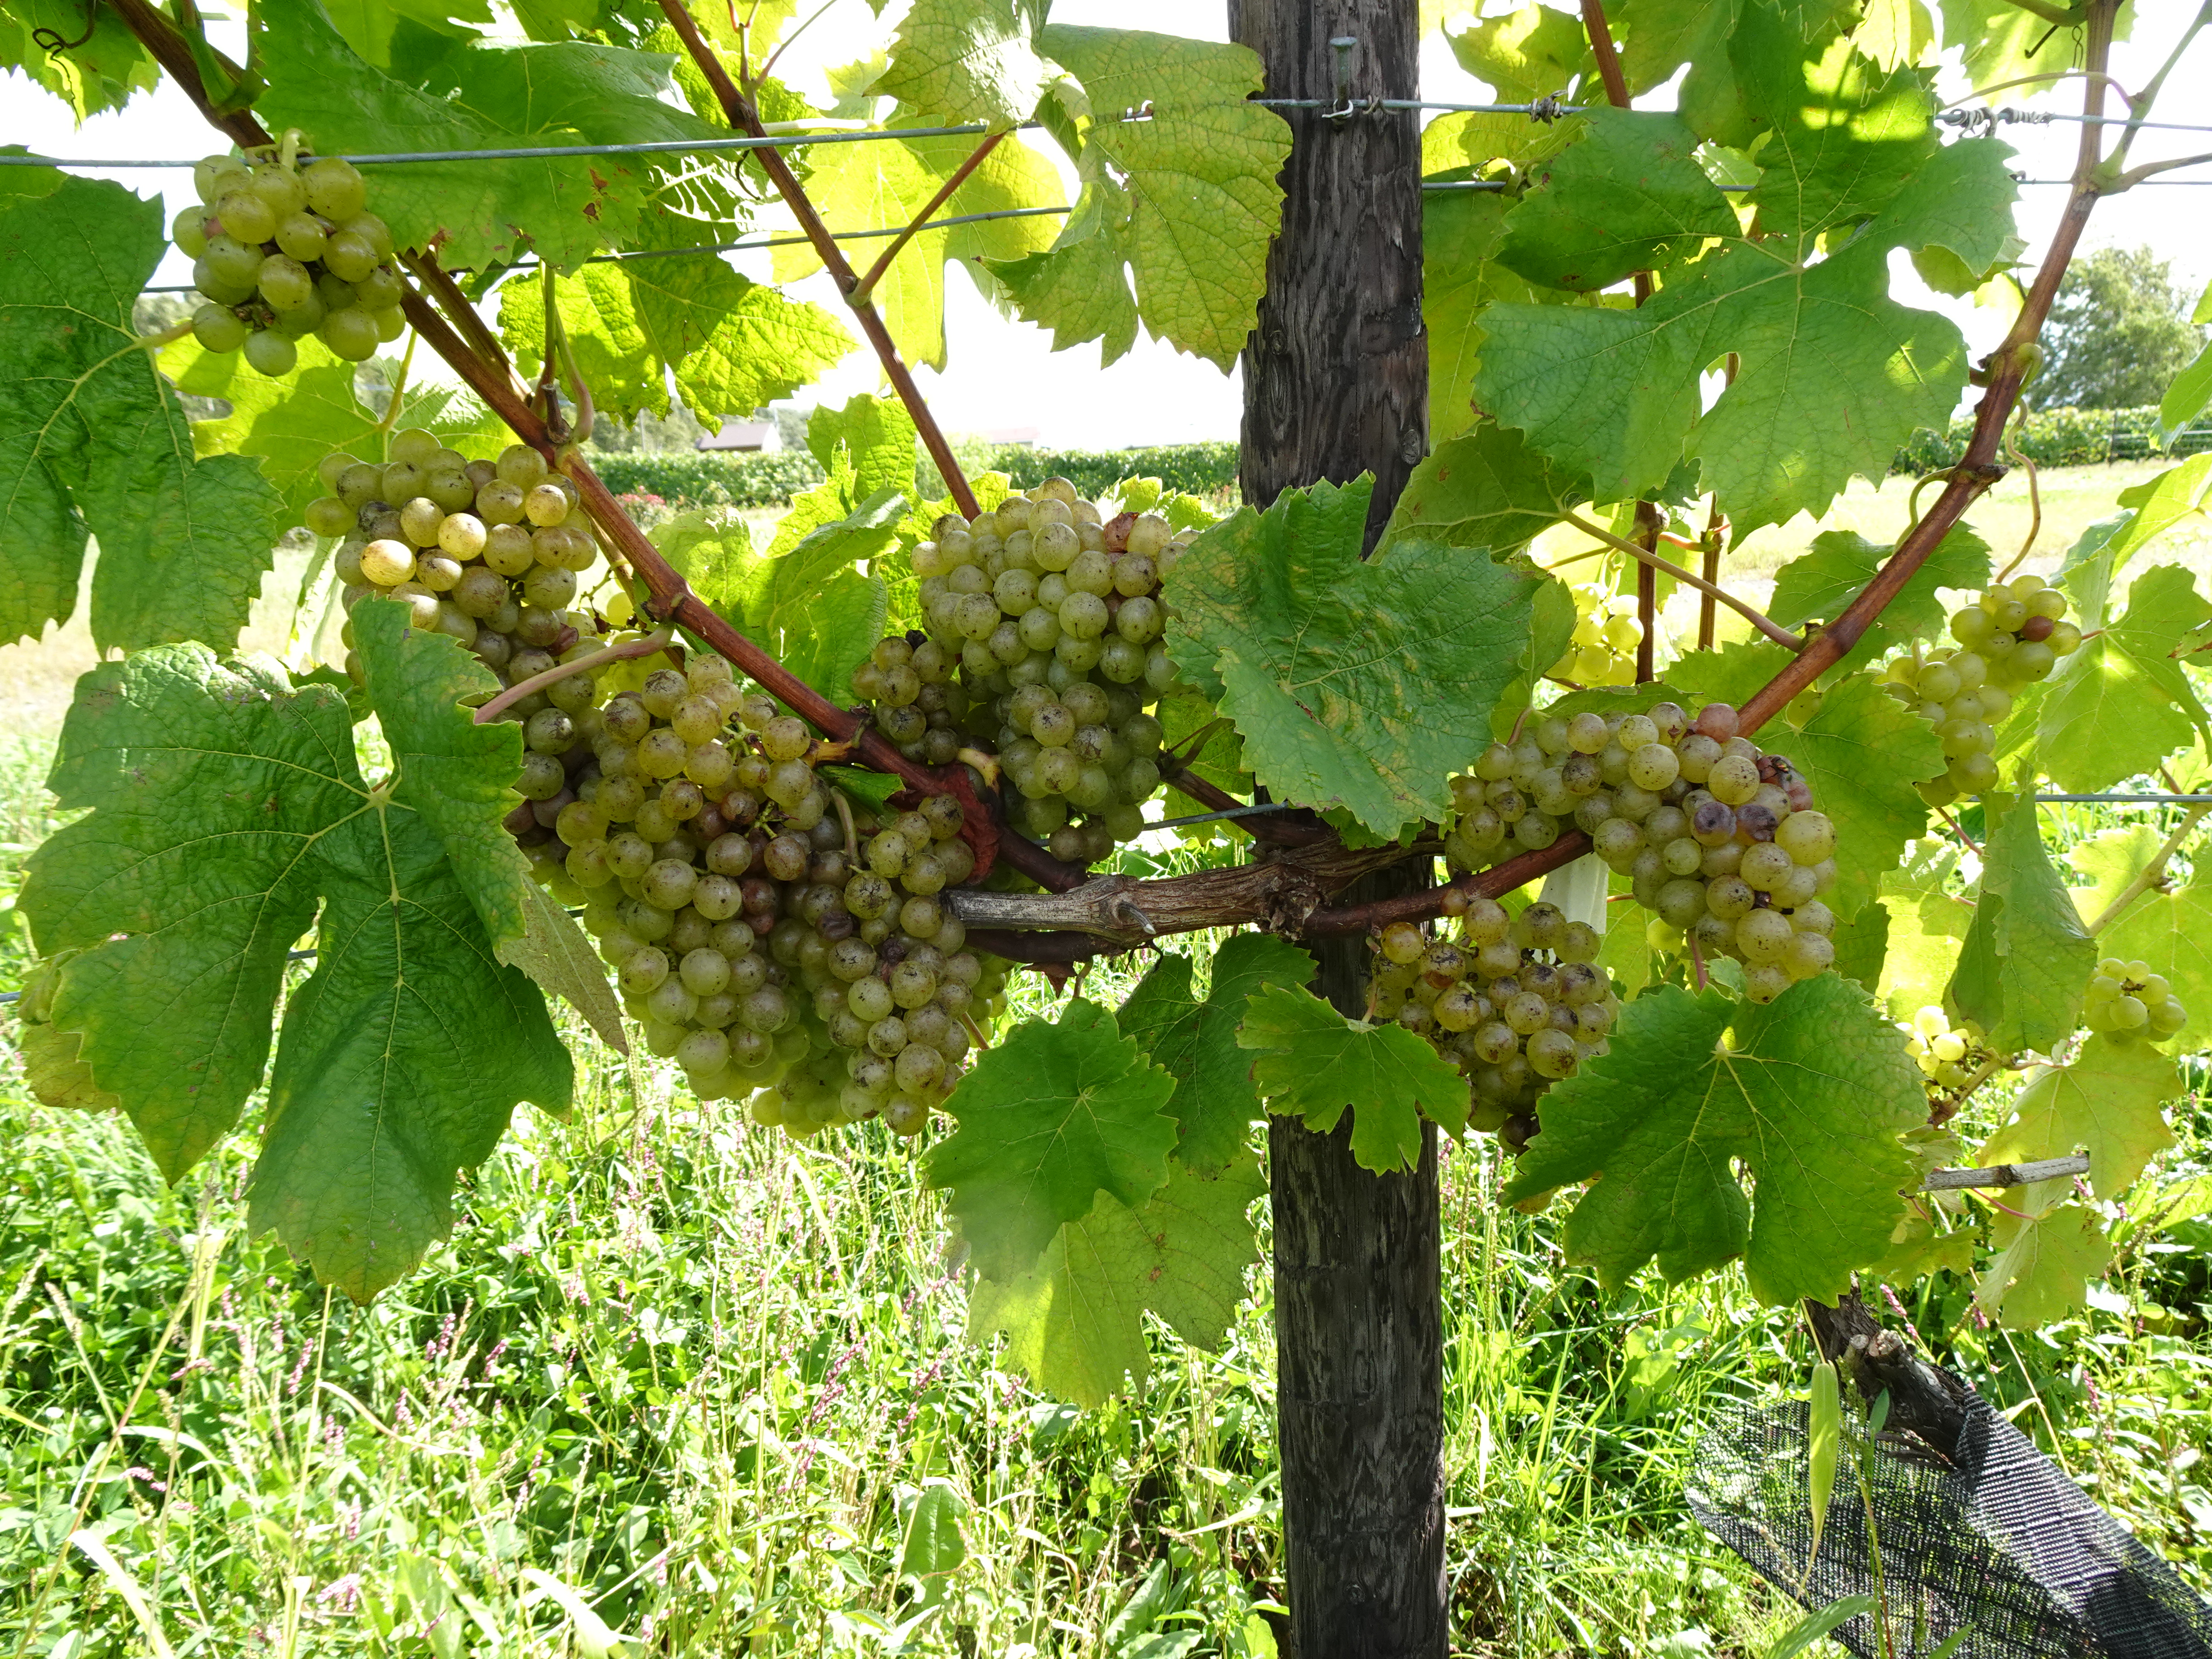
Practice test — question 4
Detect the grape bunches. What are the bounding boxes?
[1542,585,1645,686]
[563,579,689,708]
[2082,958,2187,1047]
[1893,1004,1968,1103]
[741,791,981,1136]
[172,154,407,376]
[303,430,612,849]
[1363,889,1602,1214]
[912,478,1207,862]
[752,967,858,1141]
[1864,647,2011,807]
[1442,713,1578,874]
[1952,569,2081,681]
[1563,699,1838,1003]
[957,823,1041,1046]
[852,637,968,768]
[557,651,823,1101]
